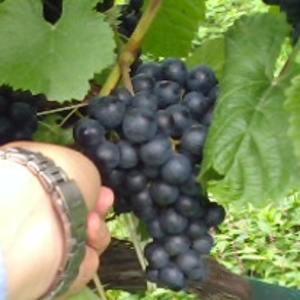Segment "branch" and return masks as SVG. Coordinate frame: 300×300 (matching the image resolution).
Masks as SVG:
<instances>
[{"instance_id":"obj_1","label":"branch","mask_w":300,"mask_h":300,"mask_svg":"<svg viewBox=\"0 0 300 300\" xmlns=\"http://www.w3.org/2000/svg\"><path fill=\"white\" fill-rule=\"evenodd\" d=\"M161 4L162 0H153L146 11L142 14L141 19L137 24L136 30L131 35V38L128 40L127 45L121 52L117 67L105 80V82L101 86V89H98L96 91V94L98 96H109L112 93L119 79L124 75L126 68L128 67V64L131 60L132 54L140 46L141 39L144 37L150 25V22L154 18Z\"/></svg>"}]
</instances>
